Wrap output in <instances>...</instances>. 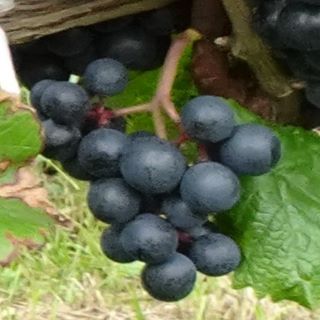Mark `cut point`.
Masks as SVG:
<instances>
[{"label": "cut point", "instance_id": "obj_1", "mask_svg": "<svg viewBox=\"0 0 320 320\" xmlns=\"http://www.w3.org/2000/svg\"><path fill=\"white\" fill-rule=\"evenodd\" d=\"M202 34L193 28L189 27L181 31L171 43L166 54L164 64L158 74L154 98L147 105H139L128 107L120 110L105 111L107 119L113 117L130 118L140 114H147L152 116L154 122L155 135L163 140H167L166 128L161 112H166L175 121L181 133L184 130L183 121L174 108L170 95L174 78L177 74L181 57L185 51L188 42L201 38Z\"/></svg>", "mask_w": 320, "mask_h": 320}]
</instances>
